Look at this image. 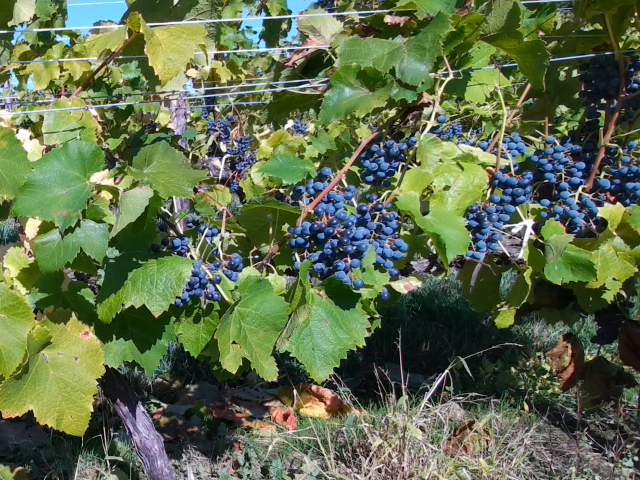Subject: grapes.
I'll use <instances>...</instances> for the list:
<instances>
[{
	"instance_id": "grapes-1",
	"label": "grapes",
	"mask_w": 640,
	"mask_h": 480,
	"mask_svg": "<svg viewBox=\"0 0 640 480\" xmlns=\"http://www.w3.org/2000/svg\"><path fill=\"white\" fill-rule=\"evenodd\" d=\"M358 187L348 184L344 191H330L325 195L320 203L312 209L316 217H323L326 214L335 216L327 223H312L304 221L302 226H289L287 232L295 234L297 237L289 241L291 249H309L311 241L323 250L313 251L303 258L302 262L315 259L313 272L323 273L325 278L335 274L338 280L351 285L354 288H362L364 281L361 278L352 280L349 275L352 268L361 267V259L367 255L370 245L371 231H377V235L371 245L377 254L375 262L388 269L391 277H398L400 270L395 267L393 261H400L404 257V252L410 250V245L400 238L397 230L400 222L396 218L400 217L397 211L389 214L380 213L378 223L372 220V212L389 210L393 207L390 202L387 205L376 203L370 210L364 202L356 205V212L348 215L344 210L343 201H350Z\"/></svg>"
},
{
	"instance_id": "grapes-2",
	"label": "grapes",
	"mask_w": 640,
	"mask_h": 480,
	"mask_svg": "<svg viewBox=\"0 0 640 480\" xmlns=\"http://www.w3.org/2000/svg\"><path fill=\"white\" fill-rule=\"evenodd\" d=\"M576 134V130H570L569 137L561 139V145H554L556 138L548 136L546 143L554 146H548L544 151L537 149L531 154L529 161L537 163V169L534 172L523 170L519 179L504 176L503 172L507 170V167H500V170L493 175V185L502 190V194H491L489 201L495 204L503 202L505 205L489 206L485 211H480L481 205L479 203H474L466 208L467 225L474 228L473 238L476 240L474 242L476 250H468L464 253L465 257L482 259L488 248L497 250L499 248L497 241L503 239V234L494 229L502 228L504 223L510 221L509 213H514L516 207L524 205L530 199L533 194L531 184L534 181H549L551 184H556L558 182L557 171L564 169L567 170L569 178L558 184L554 190V197L564 201V207L556 206L552 209V213L555 214V221H559L565 215L572 218L569 222V230L572 234L581 235L582 220L586 218L587 213L579 212L580 206L571 198L570 191H575L580 185L587 183V178L583 173L589 172L596 155L593 154L594 145L592 142H585L582 146L575 142ZM567 151L580 154L581 160L572 162L568 156H565Z\"/></svg>"
},
{
	"instance_id": "grapes-3",
	"label": "grapes",
	"mask_w": 640,
	"mask_h": 480,
	"mask_svg": "<svg viewBox=\"0 0 640 480\" xmlns=\"http://www.w3.org/2000/svg\"><path fill=\"white\" fill-rule=\"evenodd\" d=\"M581 72H587L579 76V81L584 83L583 90L579 91L580 98H586L582 102L583 107L591 106L586 111V118H600L599 110L607 108L600 99L616 100L621 92L620 71L617 67L616 57L608 55L606 57L591 58L589 63H583L578 67Z\"/></svg>"
},
{
	"instance_id": "grapes-4",
	"label": "grapes",
	"mask_w": 640,
	"mask_h": 480,
	"mask_svg": "<svg viewBox=\"0 0 640 480\" xmlns=\"http://www.w3.org/2000/svg\"><path fill=\"white\" fill-rule=\"evenodd\" d=\"M404 138L405 133L398 131L391 137V140L383 142V148L379 144H372L360 153L361 166L366 168L362 173V178L367 185L391 186V181L386 180L387 176L396 174L400 163L406 161L404 151L410 149L417 141L415 133L408 136L406 141L399 143Z\"/></svg>"
},
{
	"instance_id": "grapes-5",
	"label": "grapes",
	"mask_w": 640,
	"mask_h": 480,
	"mask_svg": "<svg viewBox=\"0 0 640 480\" xmlns=\"http://www.w3.org/2000/svg\"><path fill=\"white\" fill-rule=\"evenodd\" d=\"M608 172L615 175V178H594L590 193L595 194L598 189V199L610 205L611 200L606 196L607 191H610V195L615 196L623 207H631L635 200L640 199V166L610 167Z\"/></svg>"
},
{
	"instance_id": "grapes-6",
	"label": "grapes",
	"mask_w": 640,
	"mask_h": 480,
	"mask_svg": "<svg viewBox=\"0 0 640 480\" xmlns=\"http://www.w3.org/2000/svg\"><path fill=\"white\" fill-rule=\"evenodd\" d=\"M203 265V260L199 259L197 263L192 262V274L193 276L190 278V282H186L182 288L181 298H177L174 301V304L177 307L183 306V301L189 302V296L196 295L197 297H202L205 294V297L209 301L220 302L222 300V295L220 292H217L216 286L222 282V277L220 275L212 276V283L210 281V277L208 274L201 269Z\"/></svg>"
},
{
	"instance_id": "grapes-7",
	"label": "grapes",
	"mask_w": 640,
	"mask_h": 480,
	"mask_svg": "<svg viewBox=\"0 0 640 480\" xmlns=\"http://www.w3.org/2000/svg\"><path fill=\"white\" fill-rule=\"evenodd\" d=\"M640 58L634 55L630 58L631 64L628 66L625 76V95L636 93L640 90V76L632 77L636 72L640 71ZM640 105V93L631 95L622 102V108L625 110L624 115H620L616 120V125L620 126L621 122H626L628 118L634 117L633 111H638Z\"/></svg>"
},
{
	"instance_id": "grapes-8",
	"label": "grapes",
	"mask_w": 640,
	"mask_h": 480,
	"mask_svg": "<svg viewBox=\"0 0 640 480\" xmlns=\"http://www.w3.org/2000/svg\"><path fill=\"white\" fill-rule=\"evenodd\" d=\"M333 170L328 166H323L321 171L317 173L319 178H329L327 181H316L314 178H309L305 185H297L293 189V193L291 194V199L293 201H300L304 205H308L311 202V198L303 197L302 194L305 192L308 195L314 196L317 192L324 190L332 178Z\"/></svg>"
},
{
	"instance_id": "grapes-9",
	"label": "grapes",
	"mask_w": 640,
	"mask_h": 480,
	"mask_svg": "<svg viewBox=\"0 0 640 480\" xmlns=\"http://www.w3.org/2000/svg\"><path fill=\"white\" fill-rule=\"evenodd\" d=\"M243 271V258L239 253H232L229 259L228 267L224 270V275L230 282H237L240 279V273Z\"/></svg>"
},
{
	"instance_id": "grapes-10",
	"label": "grapes",
	"mask_w": 640,
	"mask_h": 480,
	"mask_svg": "<svg viewBox=\"0 0 640 480\" xmlns=\"http://www.w3.org/2000/svg\"><path fill=\"white\" fill-rule=\"evenodd\" d=\"M510 137L504 138V147L509 150L510 156L516 158L518 154H525L527 146L522 142L521 133L513 131Z\"/></svg>"
},
{
	"instance_id": "grapes-11",
	"label": "grapes",
	"mask_w": 640,
	"mask_h": 480,
	"mask_svg": "<svg viewBox=\"0 0 640 480\" xmlns=\"http://www.w3.org/2000/svg\"><path fill=\"white\" fill-rule=\"evenodd\" d=\"M203 222L202 218H188L186 221L187 228H193L194 226H198V231L201 234L205 233V238L208 242H212L213 238L219 235L221 229L219 227H213L210 223H205L200 225Z\"/></svg>"
},
{
	"instance_id": "grapes-12",
	"label": "grapes",
	"mask_w": 640,
	"mask_h": 480,
	"mask_svg": "<svg viewBox=\"0 0 640 480\" xmlns=\"http://www.w3.org/2000/svg\"><path fill=\"white\" fill-rule=\"evenodd\" d=\"M171 250L176 252L177 256L186 257L190 252V240L186 235L179 234L171 240Z\"/></svg>"
},
{
	"instance_id": "grapes-13",
	"label": "grapes",
	"mask_w": 640,
	"mask_h": 480,
	"mask_svg": "<svg viewBox=\"0 0 640 480\" xmlns=\"http://www.w3.org/2000/svg\"><path fill=\"white\" fill-rule=\"evenodd\" d=\"M579 202L583 206H585L586 209L588 210V212L590 213V217H591V221L592 222H596V221H600L601 220L600 216H596V214L598 213V205L592 199H590L587 195L580 194L579 195Z\"/></svg>"
},
{
	"instance_id": "grapes-14",
	"label": "grapes",
	"mask_w": 640,
	"mask_h": 480,
	"mask_svg": "<svg viewBox=\"0 0 640 480\" xmlns=\"http://www.w3.org/2000/svg\"><path fill=\"white\" fill-rule=\"evenodd\" d=\"M618 152V148L615 146H607L605 148V154L602 156L601 163H606L607 165H611L614 163L613 156Z\"/></svg>"
},
{
	"instance_id": "grapes-15",
	"label": "grapes",
	"mask_w": 640,
	"mask_h": 480,
	"mask_svg": "<svg viewBox=\"0 0 640 480\" xmlns=\"http://www.w3.org/2000/svg\"><path fill=\"white\" fill-rule=\"evenodd\" d=\"M602 47L599 45H596L592 48V52L593 53H597V52H604V51H608L611 49V44L608 43L607 41H603L602 42Z\"/></svg>"
}]
</instances>
